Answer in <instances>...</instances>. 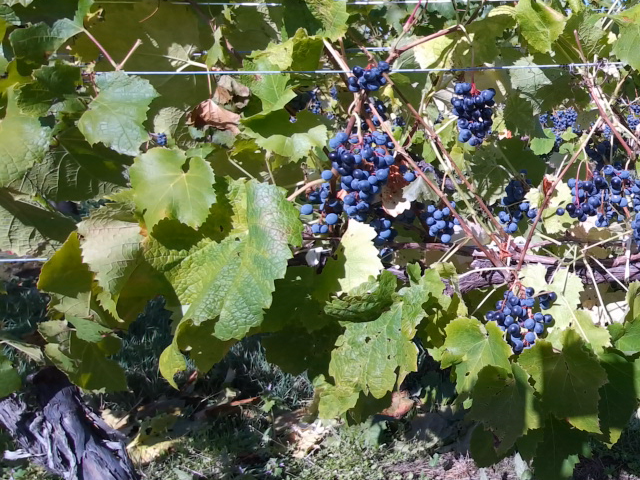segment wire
<instances>
[{
	"label": "wire",
	"instance_id": "obj_1",
	"mask_svg": "<svg viewBox=\"0 0 640 480\" xmlns=\"http://www.w3.org/2000/svg\"><path fill=\"white\" fill-rule=\"evenodd\" d=\"M614 65H623L622 60H611V61H590V62H569V63H538V64H530V65H496L491 67H458V68H446V67H435V68H417V67H409V68H397V69H388V74H400V73H460V72H493L498 70H507V71H520V70H530V69H553V68H571V67H592V66H614Z\"/></svg>",
	"mask_w": 640,
	"mask_h": 480
},
{
	"label": "wire",
	"instance_id": "obj_2",
	"mask_svg": "<svg viewBox=\"0 0 640 480\" xmlns=\"http://www.w3.org/2000/svg\"><path fill=\"white\" fill-rule=\"evenodd\" d=\"M352 69H330V70H314V69H271V70H257L250 71L244 69H229V70H138V71H125V76H140V75H210V76H223L231 74H242L248 76L259 75H273V74H312V75H336V74H352Z\"/></svg>",
	"mask_w": 640,
	"mask_h": 480
}]
</instances>
